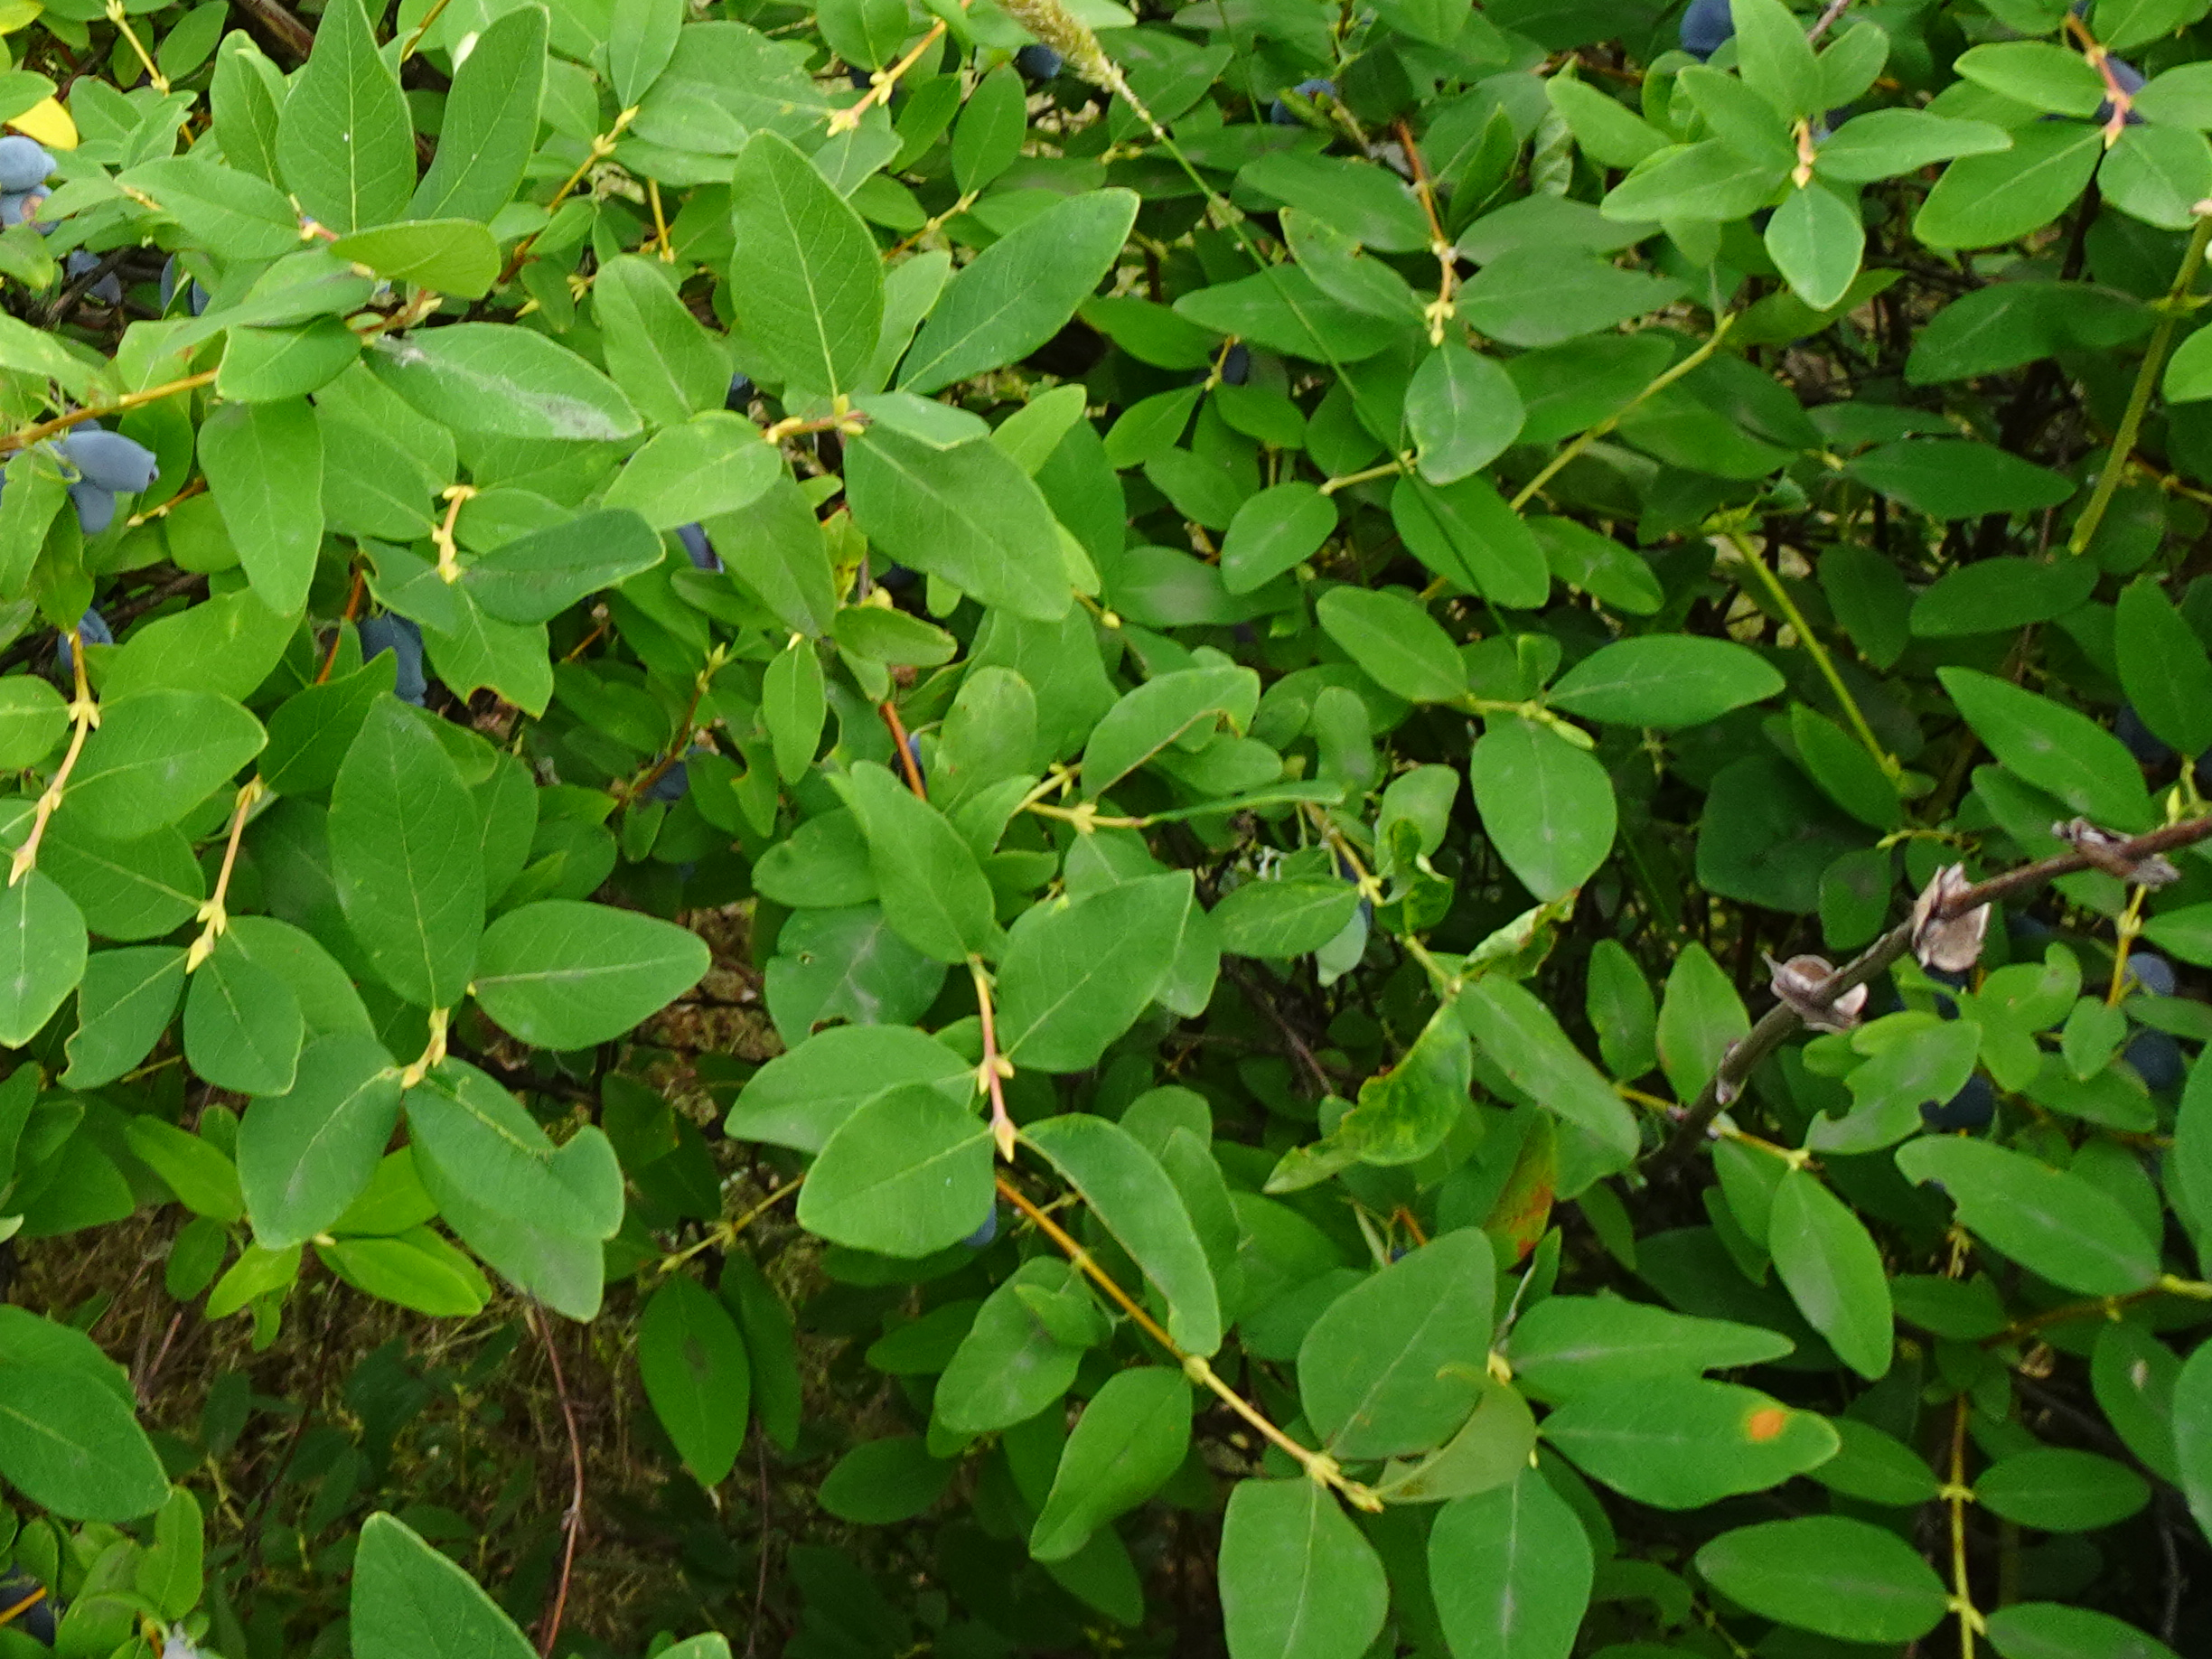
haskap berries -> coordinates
[73,489,114,534]
[682,521,715,568]
[2006,916,2052,939]
[893,739,921,770]
[0,1584,57,1643]
[57,623,97,664]
[1037,328,1107,377]
[656,757,691,798]
[1892,973,1959,1021]
[1355,896,1375,931]
[2127,1033,2178,1084]
[2100,59,2144,121]
[1223,348,1252,385]
[0,186,56,234]
[84,609,113,646]
[56,430,161,492]
[72,420,103,431]
[877,568,919,586]
[1675,0,1734,49]
[0,135,58,184]
[1316,913,1365,985]
[959,1205,1005,1245]
[2068,1,2089,52]
[2124,952,2175,995]
[1272,80,1335,121]
[1018,42,1056,78]
[65,250,124,309]
[1921,1077,1992,1129]
[367,614,423,694]
[729,374,750,390]
[2118,714,2168,774]
[1753,210,1771,231]
[850,70,873,88]
[154,246,200,313]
